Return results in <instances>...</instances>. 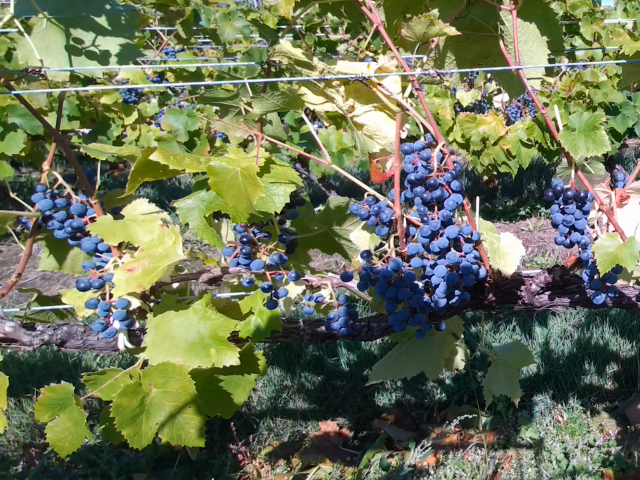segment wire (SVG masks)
Wrapping results in <instances>:
<instances>
[{
    "instance_id": "a73af890",
    "label": "wire",
    "mask_w": 640,
    "mask_h": 480,
    "mask_svg": "<svg viewBox=\"0 0 640 480\" xmlns=\"http://www.w3.org/2000/svg\"><path fill=\"white\" fill-rule=\"evenodd\" d=\"M71 307L70 303L55 304V305H32L29 308H0V313H40V312H52L68 309Z\"/></svg>"
},
{
    "instance_id": "d2f4af69",
    "label": "wire",
    "mask_w": 640,
    "mask_h": 480,
    "mask_svg": "<svg viewBox=\"0 0 640 480\" xmlns=\"http://www.w3.org/2000/svg\"><path fill=\"white\" fill-rule=\"evenodd\" d=\"M630 59H605V60H581V61H567V62H530L525 64H512L505 67H473L466 69H420L411 72L403 73H385L384 71L374 73H354L345 75H311V76H296L294 78H239V79H224L218 81H203V80H178L168 81L165 83H134V84H119V85H97V86H82V87H56L45 89H26L20 91H3L0 90L2 97L22 96L28 94H48L58 92H84V91H99V90H121V89H136V88H167L170 86L181 85H201V86H220L226 84H241V83H296L298 81H313V80H347L356 78H405L413 77L422 74H468L475 72H503V73H515L523 71L524 69H541L543 67H569V66H583V65H607V64H630Z\"/></svg>"
},
{
    "instance_id": "4f2155b8",
    "label": "wire",
    "mask_w": 640,
    "mask_h": 480,
    "mask_svg": "<svg viewBox=\"0 0 640 480\" xmlns=\"http://www.w3.org/2000/svg\"><path fill=\"white\" fill-rule=\"evenodd\" d=\"M252 291L251 290H246V291H240V292H236V293H216L214 295L215 299H219V298H239L242 296H248L251 295Z\"/></svg>"
}]
</instances>
